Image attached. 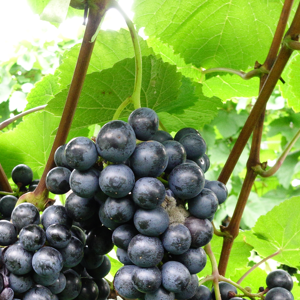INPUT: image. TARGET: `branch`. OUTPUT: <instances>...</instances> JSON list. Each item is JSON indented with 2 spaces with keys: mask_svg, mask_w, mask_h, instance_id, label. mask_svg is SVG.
Wrapping results in <instances>:
<instances>
[{
  "mask_svg": "<svg viewBox=\"0 0 300 300\" xmlns=\"http://www.w3.org/2000/svg\"><path fill=\"white\" fill-rule=\"evenodd\" d=\"M110 3L111 0H97L92 5L89 12L88 24L81 41L79 58L72 77L70 91L66 94L67 100L62 110L59 128L45 165V170L42 173L41 180L38 182L36 189L33 190V192H24L23 195L19 197L22 203H33L40 211H45L54 204V199L49 198V190L45 185V178L47 173L55 167L54 157L57 149L60 145L65 143L68 132L71 130V122L81 96V90L87 74L92 51Z\"/></svg>",
  "mask_w": 300,
  "mask_h": 300,
  "instance_id": "2",
  "label": "branch"
},
{
  "mask_svg": "<svg viewBox=\"0 0 300 300\" xmlns=\"http://www.w3.org/2000/svg\"><path fill=\"white\" fill-rule=\"evenodd\" d=\"M292 5L293 0H284L278 22L274 28L268 56L265 58V64H258L255 67V72L258 74L259 81L258 100L255 103L251 114L248 116V120L242 127L241 133L219 175V181L221 183H227L229 181L231 173L235 169L236 163L252 134L250 157L247 160V175L242 184L240 196L236 203L231 222L227 226L221 228L223 242L222 251L218 261V272L221 276L225 275L226 268L228 267L231 256V247L234 238L238 235L242 214L245 212L251 189L258 176V172L260 171V143L266 102L269 100L284 67L292 57V52L300 49V5L294 13L293 21L289 25L286 35L284 36V44L280 49Z\"/></svg>",
  "mask_w": 300,
  "mask_h": 300,
  "instance_id": "1",
  "label": "branch"
}]
</instances>
